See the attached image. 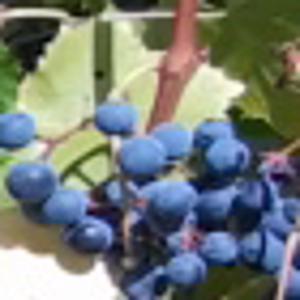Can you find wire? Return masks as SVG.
<instances>
[{
  "instance_id": "1",
  "label": "wire",
  "mask_w": 300,
  "mask_h": 300,
  "mask_svg": "<svg viewBox=\"0 0 300 300\" xmlns=\"http://www.w3.org/2000/svg\"><path fill=\"white\" fill-rule=\"evenodd\" d=\"M2 19L33 17L58 20L61 24L110 23L118 21L166 23L173 19L170 10L161 12L113 10L106 12L69 13L65 7L43 8L37 6H10L0 10Z\"/></svg>"
}]
</instances>
